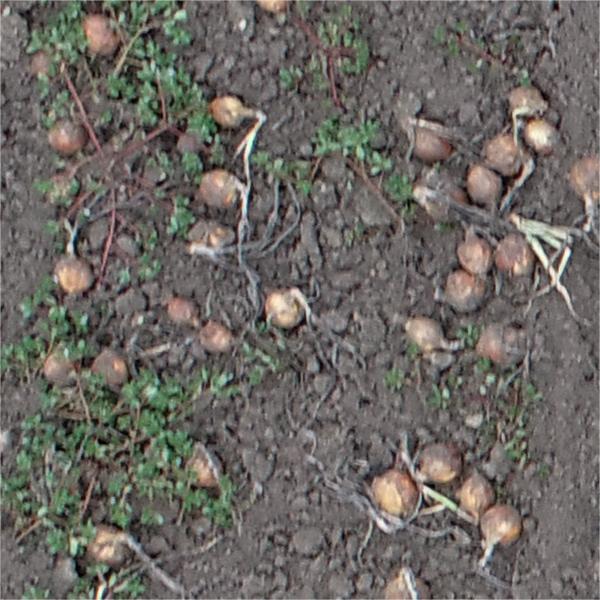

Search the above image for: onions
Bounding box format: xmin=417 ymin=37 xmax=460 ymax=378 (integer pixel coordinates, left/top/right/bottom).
xmin=459 ymin=476 xmax=493 ymax=513
xmin=197 ymin=319 xmax=230 ymax=354
xmin=493 ymin=235 xmax=531 ymax=275
xmin=162 ymin=294 xmax=198 ymax=329
xmin=443 ymin=269 xmax=488 ymax=310
xmin=86 ymin=522 xmax=132 ymax=568
xmin=476 ymin=323 xmax=524 ymax=366
xmin=208 ymin=93 xmax=244 ymax=127
xmin=509 ymin=84 xmax=544 ymax=122
xmin=481 ymin=133 xmax=519 ymax=174
xmin=185 ymin=447 xmax=219 ymax=491
xmin=81 ymin=14 xmax=119 ymax=56
xmin=477 ymin=506 xmax=522 ymax=553
xmin=51 ymin=256 xmax=92 ymax=295
xmin=40 ymin=349 xmax=73 ymax=384
xmin=24 ymin=50 xmax=52 ymax=76
xmin=419 ymin=441 xmax=460 ymax=485
xmin=188 ymin=223 xmax=229 ymax=252
xmin=520 ymin=118 xmax=558 ymax=152
xmin=569 ymin=156 xmax=600 ymax=201
xmin=465 ymin=166 xmax=500 ymax=205
xmin=44 ymin=173 xmax=77 ymax=203
xmin=48 ymin=118 xmax=85 ymax=155
xmin=406 ymin=316 xmax=443 ymax=353
xmin=253 ymin=0 xmax=291 ymax=14
xmin=458 ymin=235 xmax=491 ymax=272
xmin=437 ymin=182 xmax=470 ymax=218
xmin=91 ymin=349 xmax=129 ymax=389
xmin=265 ymin=287 xmax=304 ymax=327
xmin=368 ymin=469 xmax=418 ymax=518
xmin=193 ymin=169 xmax=236 ymax=212
xmin=388 ymin=569 xmax=421 ymax=598
xmin=412 ymin=126 xmax=449 ymax=164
